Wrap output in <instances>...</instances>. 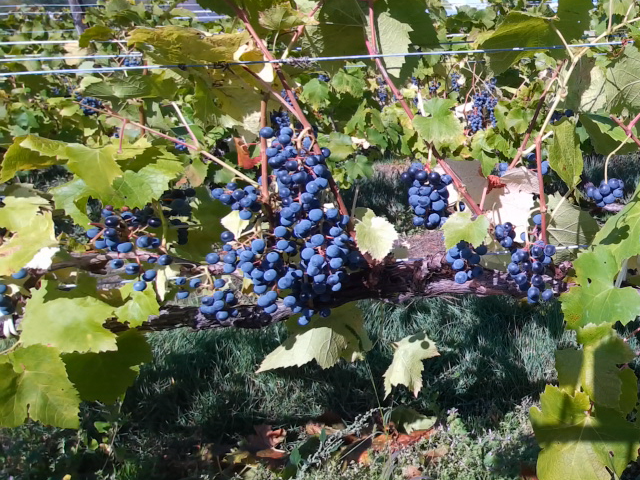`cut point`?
I'll use <instances>...</instances> for the list:
<instances>
[{
  "label": "cut point",
  "mask_w": 640,
  "mask_h": 480,
  "mask_svg": "<svg viewBox=\"0 0 640 480\" xmlns=\"http://www.w3.org/2000/svg\"><path fill=\"white\" fill-rule=\"evenodd\" d=\"M631 137H629L628 135L626 136V138L622 141V143L611 153L608 154V157H612L614 156L616 153H618L620 151V149L622 147H624V145L627 143V141L630 139Z\"/></svg>",
  "instance_id": "1"
},
{
  "label": "cut point",
  "mask_w": 640,
  "mask_h": 480,
  "mask_svg": "<svg viewBox=\"0 0 640 480\" xmlns=\"http://www.w3.org/2000/svg\"><path fill=\"white\" fill-rule=\"evenodd\" d=\"M538 210H539V207L533 208L525 216V220H524V232L525 233H527V222H528L529 217L532 215V213H534L535 211H538Z\"/></svg>",
  "instance_id": "2"
}]
</instances>
